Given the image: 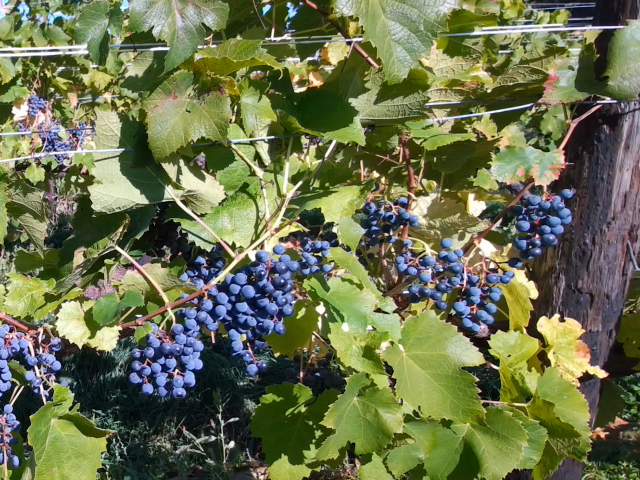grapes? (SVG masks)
<instances>
[{
  "mask_svg": "<svg viewBox=\"0 0 640 480\" xmlns=\"http://www.w3.org/2000/svg\"><path fill=\"white\" fill-rule=\"evenodd\" d=\"M301 255L298 260L285 252L282 244H275L273 251L278 253L280 258L270 261L271 271L275 275L273 283L268 280L269 253L265 249H258L255 252V260L251 264H243L235 270V273L227 274L224 281L208 291L211 297L215 298L214 303L207 298L200 296L193 299L198 305V310L193 307H180L178 315L188 317L184 326L180 322H174L171 326V333L174 335V342H164L155 337L158 332V325L151 322L149 327L152 333L145 336V341L149 346H145L142 351L138 347L132 349V356L140 358L142 355L149 358L151 365H142L139 360L132 362V370L129 373L128 381L133 384H143L141 392L144 395L152 396L155 387L151 383H144V376H149L153 372L155 383L160 397H168L170 390L169 374L177 365L175 356H179L185 369L183 377L176 375L171 379L172 395L177 399L186 396L187 388L196 385V375L194 372H202L204 364L201 352L205 345L201 340H197L200 335V328L206 325L208 331H216L221 323L227 331V336L232 340L231 347L233 358H242L245 370L250 376H256L260 371L267 370L266 361H256L251 353L244 349V342L239 340L241 333H245L248 339H253L258 349H265L267 341L263 335H270L273 331L277 335H285L287 326L283 323L285 317L295 312L292 300L294 294L290 292L294 286L292 279L293 272L300 271L304 275L318 274L320 270L328 273L331 270L329 264L319 267L318 263L323 261L321 256L310 254L312 250L322 251V255H329L331 243L329 241L311 240L308 237L301 239ZM254 273L256 284H249V276Z\"/></svg>",
  "mask_w": 640,
  "mask_h": 480,
  "instance_id": "1",
  "label": "grapes"
},
{
  "mask_svg": "<svg viewBox=\"0 0 640 480\" xmlns=\"http://www.w3.org/2000/svg\"><path fill=\"white\" fill-rule=\"evenodd\" d=\"M207 263V259L204 256L197 255L194 258V264L200 270H186L181 276L182 281H190L192 285L197 288L203 286L208 282H211L216 274H218L225 267V259L219 257L214 261V265L209 269H206L204 265Z\"/></svg>",
  "mask_w": 640,
  "mask_h": 480,
  "instance_id": "7",
  "label": "grapes"
},
{
  "mask_svg": "<svg viewBox=\"0 0 640 480\" xmlns=\"http://www.w3.org/2000/svg\"><path fill=\"white\" fill-rule=\"evenodd\" d=\"M23 378L27 382H31V385L33 386L32 391L35 394H38L40 392V386L44 383V379L42 377H38L35 374V370L33 368L27 370L23 375Z\"/></svg>",
  "mask_w": 640,
  "mask_h": 480,
  "instance_id": "10",
  "label": "grapes"
},
{
  "mask_svg": "<svg viewBox=\"0 0 640 480\" xmlns=\"http://www.w3.org/2000/svg\"><path fill=\"white\" fill-rule=\"evenodd\" d=\"M575 195L576 191L571 185L563 184L559 189V194H554L549 200H542L540 195L529 193L526 196L525 207L522 205L514 207V213L518 215L515 228L522 234H528L532 229V224L529 221H535L537 218L546 219L547 224L542 225L539 229L542 240L530 235L517 236L514 239L515 248L523 260L540 257L543 254L544 243L548 246L559 243L557 235L564 233L563 225L574 223L573 212L565 208L564 200L573 198Z\"/></svg>",
  "mask_w": 640,
  "mask_h": 480,
  "instance_id": "2",
  "label": "grapes"
},
{
  "mask_svg": "<svg viewBox=\"0 0 640 480\" xmlns=\"http://www.w3.org/2000/svg\"><path fill=\"white\" fill-rule=\"evenodd\" d=\"M10 333V327L6 324L0 325V398L4 396V392L11 387L12 378L11 372L8 367L7 360L11 356H15L20 350L23 349V358L31 366L39 367L43 365L42 372L55 376L57 371L62 368V363L55 358L53 354L49 352H43L36 357L30 352V341L25 338V335L18 331L12 340L5 343V336Z\"/></svg>",
  "mask_w": 640,
  "mask_h": 480,
  "instance_id": "4",
  "label": "grapes"
},
{
  "mask_svg": "<svg viewBox=\"0 0 640 480\" xmlns=\"http://www.w3.org/2000/svg\"><path fill=\"white\" fill-rule=\"evenodd\" d=\"M18 443V439L16 437L6 436L4 438V444L6 445V450L4 451V456L7 458L9 462L13 466H19L21 464V459L13 453V447Z\"/></svg>",
  "mask_w": 640,
  "mask_h": 480,
  "instance_id": "8",
  "label": "grapes"
},
{
  "mask_svg": "<svg viewBox=\"0 0 640 480\" xmlns=\"http://www.w3.org/2000/svg\"><path fill=\"white\" fill-rule=\"evenodd\" d=\"M463 256V250L456 248L454 251H440L437 254L439 260H444L442 264H437V259L431 255H425L419 259V264L416 267L413 265H407L406 262L412 258V253L406 251L400 253V256L394 259V264L397 266V271L408 275H419V279L424 283L431 282L434 275H439L443 271L455 273L456 277L441 278L436 285V289H430L428 287H422L420 284L411 285L408 291L412 294L409 297L411 303L419 302L422 297L431 298L436 300L435 308L437 310L446 311L450 308V305L443 300L444 294H450L454 286L459 285L464 280L463 269L464 265L458 261Z\"/></svg>",
  "mask_w": 640,
  "mask_h": 480,
  "instance_id": "3",
  "label": "grapes"
},
{
  "mask_svg": "<svg viewBox=\"0 0 640 480\" xmlns=\"http://www.w3.org/2000/svg\"><path fill=\"white\" fill-rule=\"evenodd\" d=\"M407 196H399L396 199V205L400 208L398 215L393 212H386L381 208H377V204L370 200L365 204V209L369 212L368 219L361 222L364 228L365 236L369 238L368 244L376 246L380 242L378 237L380 233L395 231L400 225H408L409 227H417L419 225V216L411 215L406 209Z\"/></svg>",
  "mask_w": 640,
  "mask_h": 480,
  "instance_id": "6",
  "label": "grapes"
},
{
  "mask_svg": "<svg viewBox=\"0 0 640 480\" xmlns=\"http://www.w3.org/2000/svg\"><path fill=\"white\" fill-rule=\"evenodd\" d=\"M467 281L466 285L468 286L466 289V293L468 294V299H461L459 302L455 301L453 303L454 309L460 314L463 315L462 324L466 328H470L472 331H478L480 329V324L471 318V308L470 304L481 305L483 300L481 299L482 294H486L489 292V299L492 302H498L501 299V295L503 294V290L496 286H489L483 284L481 288L476 287L480 283V278L477 275H473L472 273H468L466 275ZM492 302H486L484 304L485 310H478L476 312V316L484 322L486 326L493 324L495 319L492 314L497 312V307Z\"/></svg>",
  "mask_w": 640,
  "mask_h": 480,
  "instance_id": "5",
  "label": "grapes"
},
{
  "mask_svg": "<svg viewBox=\"0 0 640 480\" xmlns=\"http://www.w3.org/2000/svg\"><path fill=\"white\" fill-rule=\"evenodd\" d=\"M14 412V406L12 404H6L4 406V422L8 424L5 428L7 433H11L20 426V422L16 420Z\"/></svg>",
  "mask_w": 640,
  "mask_h": 480,
  "instance_id": "9",
  "label": "grapes"
}]
</instances>
